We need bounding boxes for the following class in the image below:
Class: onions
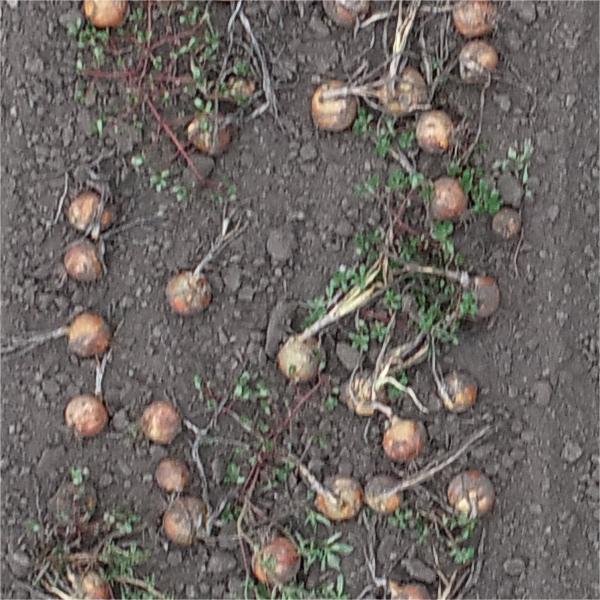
[324,476,363,515]
[391,578,433,598]
[384,67,425,112]
[344,367,377,413]
[64,394,107,437]
[434,370,477,411]
[277,334,324,382]
[311,81,355,129]
[459,40,499,74]
[414,110,452,151]
[471,277,498,317]
[452,0,496,35]
[65,190,105,230]
[446,469,493,516]
[327,0,367,30]
[187,110,233,154]
[253,535,299,583]
[61,241,101,280]
[364,472,401,513]
[382,419,423,462]
[428,177,466,219]
[83,0,127,29]
[166,269,210,312]
[138,401,177,442]
[491,208,521,239]
[225,73,253,102]
[160,497,204,543]
[65,310,110,357]
[76,570,109,599]
[153,457,187,491]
